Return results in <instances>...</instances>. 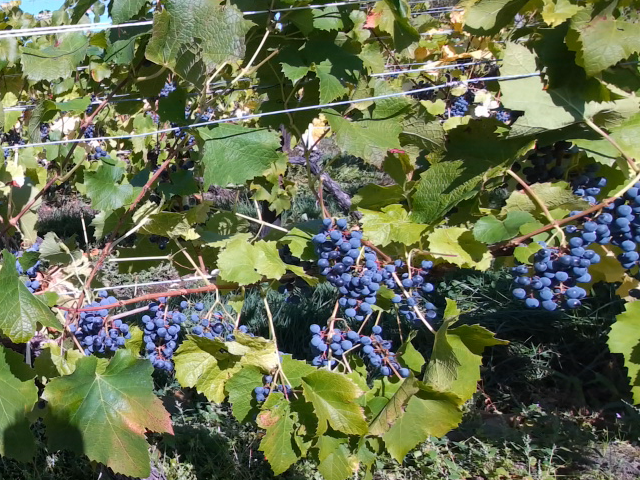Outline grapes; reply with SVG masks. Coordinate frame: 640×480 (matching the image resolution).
Segmentation results:
<instances>
[{
	"label": "grapes",
	"mask_w": 640,
	"mask_h": 480,
	"mask_svg": "<svg viewBox=\"0 0 640 480\" xmlns=\"http://www.w3.org/2000/svg\"><path fill=\"white\" fill-rule=\"evenodd\" d=\"M333 337L330 348L334 356H341L346 350L353 347V344H360L363 347V352L370 359L371 364L380 369V374L385 378H390L395 374V371L403 378H408L411 374V370L408 367L400 366L399 362L395 358V354L390 352L387 355L388 361L391 363L393 369L382 363L384 356L376 352V348L372 345L373 339L369 336H362L360 333L348 329L343 333L341 328H334L332 330Z\"/></svg>",
	"instance_id": "f8a65327"
},
{
	"label": "grapes",
	"mask_w": 640,
	"mask_h": 480,
	"mask_svg": "<svg viewBox=\"0 0 640 480\" xmlns=\"http://www.w3.org/2000/svg\"><path fill=\"white\" fill-rule=\"evenodd\" d=\"M597 171L598 166L595 163H590L585 167L584 172L574 170L571 174L572 184L576 186L574 194L592 205L600 202L595 196L599 195L601 188H604L607 184V179L604 176L596 175L591 177Z\"/></svg>",
	"instance_id": "5460f4e3"
},
{
	"label": "grapes",
	"mask_w": 640,
	"mask_h": 480,
	"mask_svg": "<svg viewBox=\"0 0 640 480\" xmlns=\"http://www.w3.org/2000/svg\"><path fill=\"white\" fill-rule=\"evenodd\" d=\"M147 310L155 317L142 315L141 322L146 324L144 329L143 342L146 345L148 358L154 367L158 370L172 372L174 365L172 361L173 351L177 348L178 334L181 330L180 323L186 320V314L177 311H168L167 317H172V322L165 320V310L159 309L156 302L147 304ZM158 337H162L166 341V346L161 350L162 357L159 358L158 352L155 351L157 344L154 343Z\"/></svg>",
	"instance_id": "0513c4c2"
},
{
	"label": "grapes",
	"mask_w": 640,
	"mask_h": 480,
	"mask_svg": "<svg viewBox=\"0 0 640 480\" xmlns=\"http://www.w3.org/2000/svg\"><path fill=\"white\" fill-rule=\"evenodd\" d=\"M110 314L108 309L97 310L90 313H80L78 325L72 323L69 325L71 332L75 335V339L80 341L82 347H87L84 354L89 356L97 351L104 353L109 347L111 352H116L120 345L125 344V339H130L132 334L128 331L127 323H123L120 318H116L114 326L118 328H109L108 335L104 327L106 316Z\"/></svg>",
	"instance_id": "84f90ec7"
},
{
	"label": "grapes",
	"mask_w": 640,
	"mask_h": 480,
	"mask_svg": "<svg viewBox=\"0 0 640 480\" xmlns=\"http://www.w3.org/2000/svg\"><path fill=\"white\" fill-rule=\"evenodd\" d=\"M421 298V292L419 290H415L411 293V296L406 299L407 305H402L399 308V312L402 316L410 322H418L420 320L419 315L412 311L409 307H414L418 304V301Z\"/></svg>",
	"instance_id": "ef6de9ee"
},
{
	"label": "grapes",
	"mask_w": 640,
	"mask_h": 480,
	"mask_svg": "<svg viewBox=\"0 0 640 480\" xmlns=\"http://www.w3.org/2000/svg\"><path fill=\"white\" fill-rule=\"evenodd\" d=\"M215 315V322H212L210 324V332H205L203 331V328L200 326H193L192 327V332L196 335V336H200L201 338H209V339H215L216 336H220L225 332V329L228 331L227 336H226V340L227 341H233L235 339V336L233 335V330H234V325L232 323H229L228 325L226 323H220L221 322V318L223 317V312L222 311H215L214 312Z\"/></svg>",
	"instance_id": "2adb6a1f"
},
{
	"label": "grapes",
	"mask_w": 640,
	"mask_h": 480,
	"mask_svg": "<svg viewBox=\"0 0 640 480\" xmlns=\"http://www.w3.org/2000/svg\"><path fill=\"white\" fill-rule=\"evenodd\" d=\"M384 327L381 324H374L371 327V332L374 334L375 340L380 345L383 350L391 349L393 347V342L390 339H383Z\"/></svg>",
	"instance_id": "1ff8f66d"
},
{
	"label": "grapes",
	"mask_w": 640,
	"mask_h": 480,
	"mask_svg": "<svg viewBox=\"0 0 640 480\" xmlns=\"http://www.w3.org/2000/svg\"><path fill=\"white\" fill-rule=\"evenodd\" d=\"M40 266V261H37L36 264L30 266L27 270H26V275L29 277H37V270L38 267Z\"/></svg>",
	"instance_id": "802abce8"
},
{
	"label": "grapes",
	"mask_w": 640,
	"mask_h": 480,
	"mask_svg": "<svg viewBox=\"0 0 640 480\" xmlns=\"http://www.w3.org/2000/svg\"><path fill=\"white\" fill-rule=\"evenodd\" d=\"M97 295L99 297H103V299L100 302L91 301L89 305H85V308L92 307V306H95V305L111 304V303H116L117 302V299L114 296H109V293L107 291L97 292Z\"/></svg>",
	"instance_id": "54f908b8"
},
{
	"label": "grapes",
	"mask_w": 640,
	"mask_h": 480,
	"mask_svg": "<svg viewBox=\"0 0 640 480\" xmlns=\"http://www.w3.org/2000/svg\"><path fill=\"white\" fill-rule=\"evenodd\" d=\"M580 236H572L568 241L570 254L555 256L560 253L558 248L552 249L544 240H540V248L535 252L534 269L542 276H520L529 272L525 264L514 265L511 273L516 276L514 283L518 286H530L539 291L543 300L542 306L553 311L558 304L553 300L561 293L554 288L564 283L568 289L563 294L569 299L566 307L577 310L582 306V300L587 297V291L580 284H589L592 275L587 270L591 265L600 262V255L592 246L594 243L620 247L624 252L618 255V261L623 269H633L637 265L640 254L636 249L640 243V181H637L623 196L603 207V213L595 220H587L583 225Z\"/></svg>",
	"instance_id": "01657485"
},
{
	"label": "grapes",
	"mask_w": 640,
	"mask_h": 480,
	"mask_svg": "<svg viewBox=\"0 0 640 480\" xmlns=\"http://www.w3.org/2000/svg\"><path fill=\"white\" fill-rule=\"evenodd\" d=\"M361 231H352L350 239L344 238L339 230L328 232L326 228H322L318 234L312 237V243L315 245L314 253L319 256L316 266L321 269L320 274L326 278L329 283L339 286V293L347 295L338 299L340 308L355 307L359 296H366L360 305V309L347 308L345 316L347 318L356 319L357 321H365L367 316L373 312V307L377 302V290L383 281L388 288L396 290L398 284L395 282L393 274L396 267L401 268L405 262L401 259H395L393 264H386L380 268V260L378 253L366 247L363 252L365 257L364 266L366 271L362 276H354L348 273L351 266L355 264V259L359 256V248L361 246Z\"/></svg>",
	"instance_id": "b958b902"
},
{
	"label": "grapes",
	"mask_w": 640,
	"mask_h": 480,
	"mask_svg": "<svg viewBox=\"0 0 640 480\" xmlns=\"http://www.w3.org/2000/svg\"><path fill=\"white\" fill-rule=\"evenodd\" d=\"M309 331L312 333L310 345L313 347V354L315 355L312 359V364L314 366H326L329 363L334 366L336 364L334 359L329 361L326 356L322 357L323 353L328 350V344L321 333H326L328 328L326 326L322 327L320 324H311Z\"/></svg>",
	"instance_id": "e5b3c951"
},
{
	"label": "grapes",
	"mask_w": 640,
	"mask_h": 480,
	"mask_svg": "<svg viewBox=\"0 0 640 480\" xmlns=\"http://www.w3.org/2000/svg\"><path fill=\"white\" fill-rule=\"evenodd\" d=\"M238 330L242 331L243 334H246L251 339L255 338V334L253 332H251V331H248V326L247 325H240L238 327Z\"/></svg>",
	"instance_id": "012428b0"
},
{
	"label": "grapes",
	"mask_w": 640,
	"mask_h": 480,
	"mask_svg": "<svg viewBox=\"0 0 640 480\" xmlns=\"http://www.w3.org/2000/svg\"><path fill=\"white\" fill-rule=\"evenodd\" d=\"M24 286L30 291V293H34V291H37V289L40 288V284L37 280H27L24 282Z\"/></svg>",
	"instance_id": "91a60905"
},
{
	"label": "grapes",
	"mask_w": 640,
	"mask_h": 480,
	"mask_svg": "<svg viewBox=\"0 0 640 480\" xmlns=\"http://www.w3.org/2000/svg\"><path fill=\"white\" fill-rule=\"evenodd\" d=\"M422 269L418 273H414L410 278V273L404 271L401 274V285L408 289L421 288L426 294H431L435 291V285L426 281V276L430 274L429 270L434 268V262L432 260H422L420 262Z\"/></svg>",
	"instance_id": "83cd7487"
},
{
	"label": "grapes",
	"mask_w": 640,
	"mask_h": 480,
	"mask_svg": "<svg viewBox=\"0 0 640 480\" xmlns=\"http://www.w3.org/2000/svg\"><path fill=\"white\" fill-rule=\"evenodd\" d=\"M191 320L193 322H198L200 320V316L196 313H193L191 315ZM200 325L203 326L204 328H208L209 327V320L207 318H203L200 320Z\"/></svg>",
	"instance_id": "dcf779d0"
}]
</instances>
